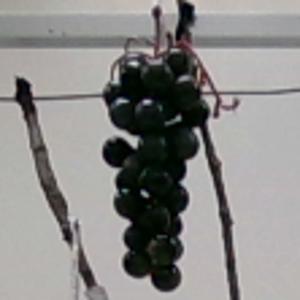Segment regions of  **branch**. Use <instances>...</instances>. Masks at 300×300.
Wrapping results in <instances>:
<instances>
[{
	"instance_id": "obj_1",
	"label": "branch",
	"mask_w": 300,
	"mask_h": 300,
	"mask_svg": "<svg viewBox=\"0 0 300 300\" xmlns=\"http://www.w3.org/2000/svg\"><path fill=\"white\" fill-rule=\"evenodd\" d=\"M13 84L15 88L13 99L21 110V120L26 124L37 182L50 214L58 224L62 242H65L76 259L78 275L85 284L83 295L87 300H109L106 288L99 285L82 243L72 229L68 200L61 191L58 178L52 169L50 151L39 123V109L34 103L33 84L25 76L17 73H14Z\"/></svg>"
},
{
	"instance_id": "obj_2",
	"label": "branch",
	"mask_w": 300,
	"mask_h": 300,
	"mask_svg": "<svg viewBox=\"0 0 300 300\" xmlns=\"http://www.w3.org/2000/svg\"><path fill=\"white\" fill-rule=\"evenodd\" d=\"M196 129L198 130L202 140L204 157L218 205L217 215L220 225L221 239L223 242L224 268L229 300H242L233 231L235 218L228 202V195L223 178V163L217 154V149L212 139L209 121L203 127Z\"/></svg>"
},
{
	"instance_id": "obj_3",
	"label": "branch",
	"mask_w": 300,
	"mask_h": 300,
	"mask_svg": "<svg viewBox=\"0 0 300 300\" xmlns=\"http://www.w3.org/2000/svg\"><path fill=\"white\" fill-rule=\"evenodd\" d=\"M177 7V21L173 38L176 47L183 48L193 55L196 68L193 77L197 79L199 68V55L193 51V31L198 21L196 6L190 0H174Z\"/></svg>"
}]
</instances>
